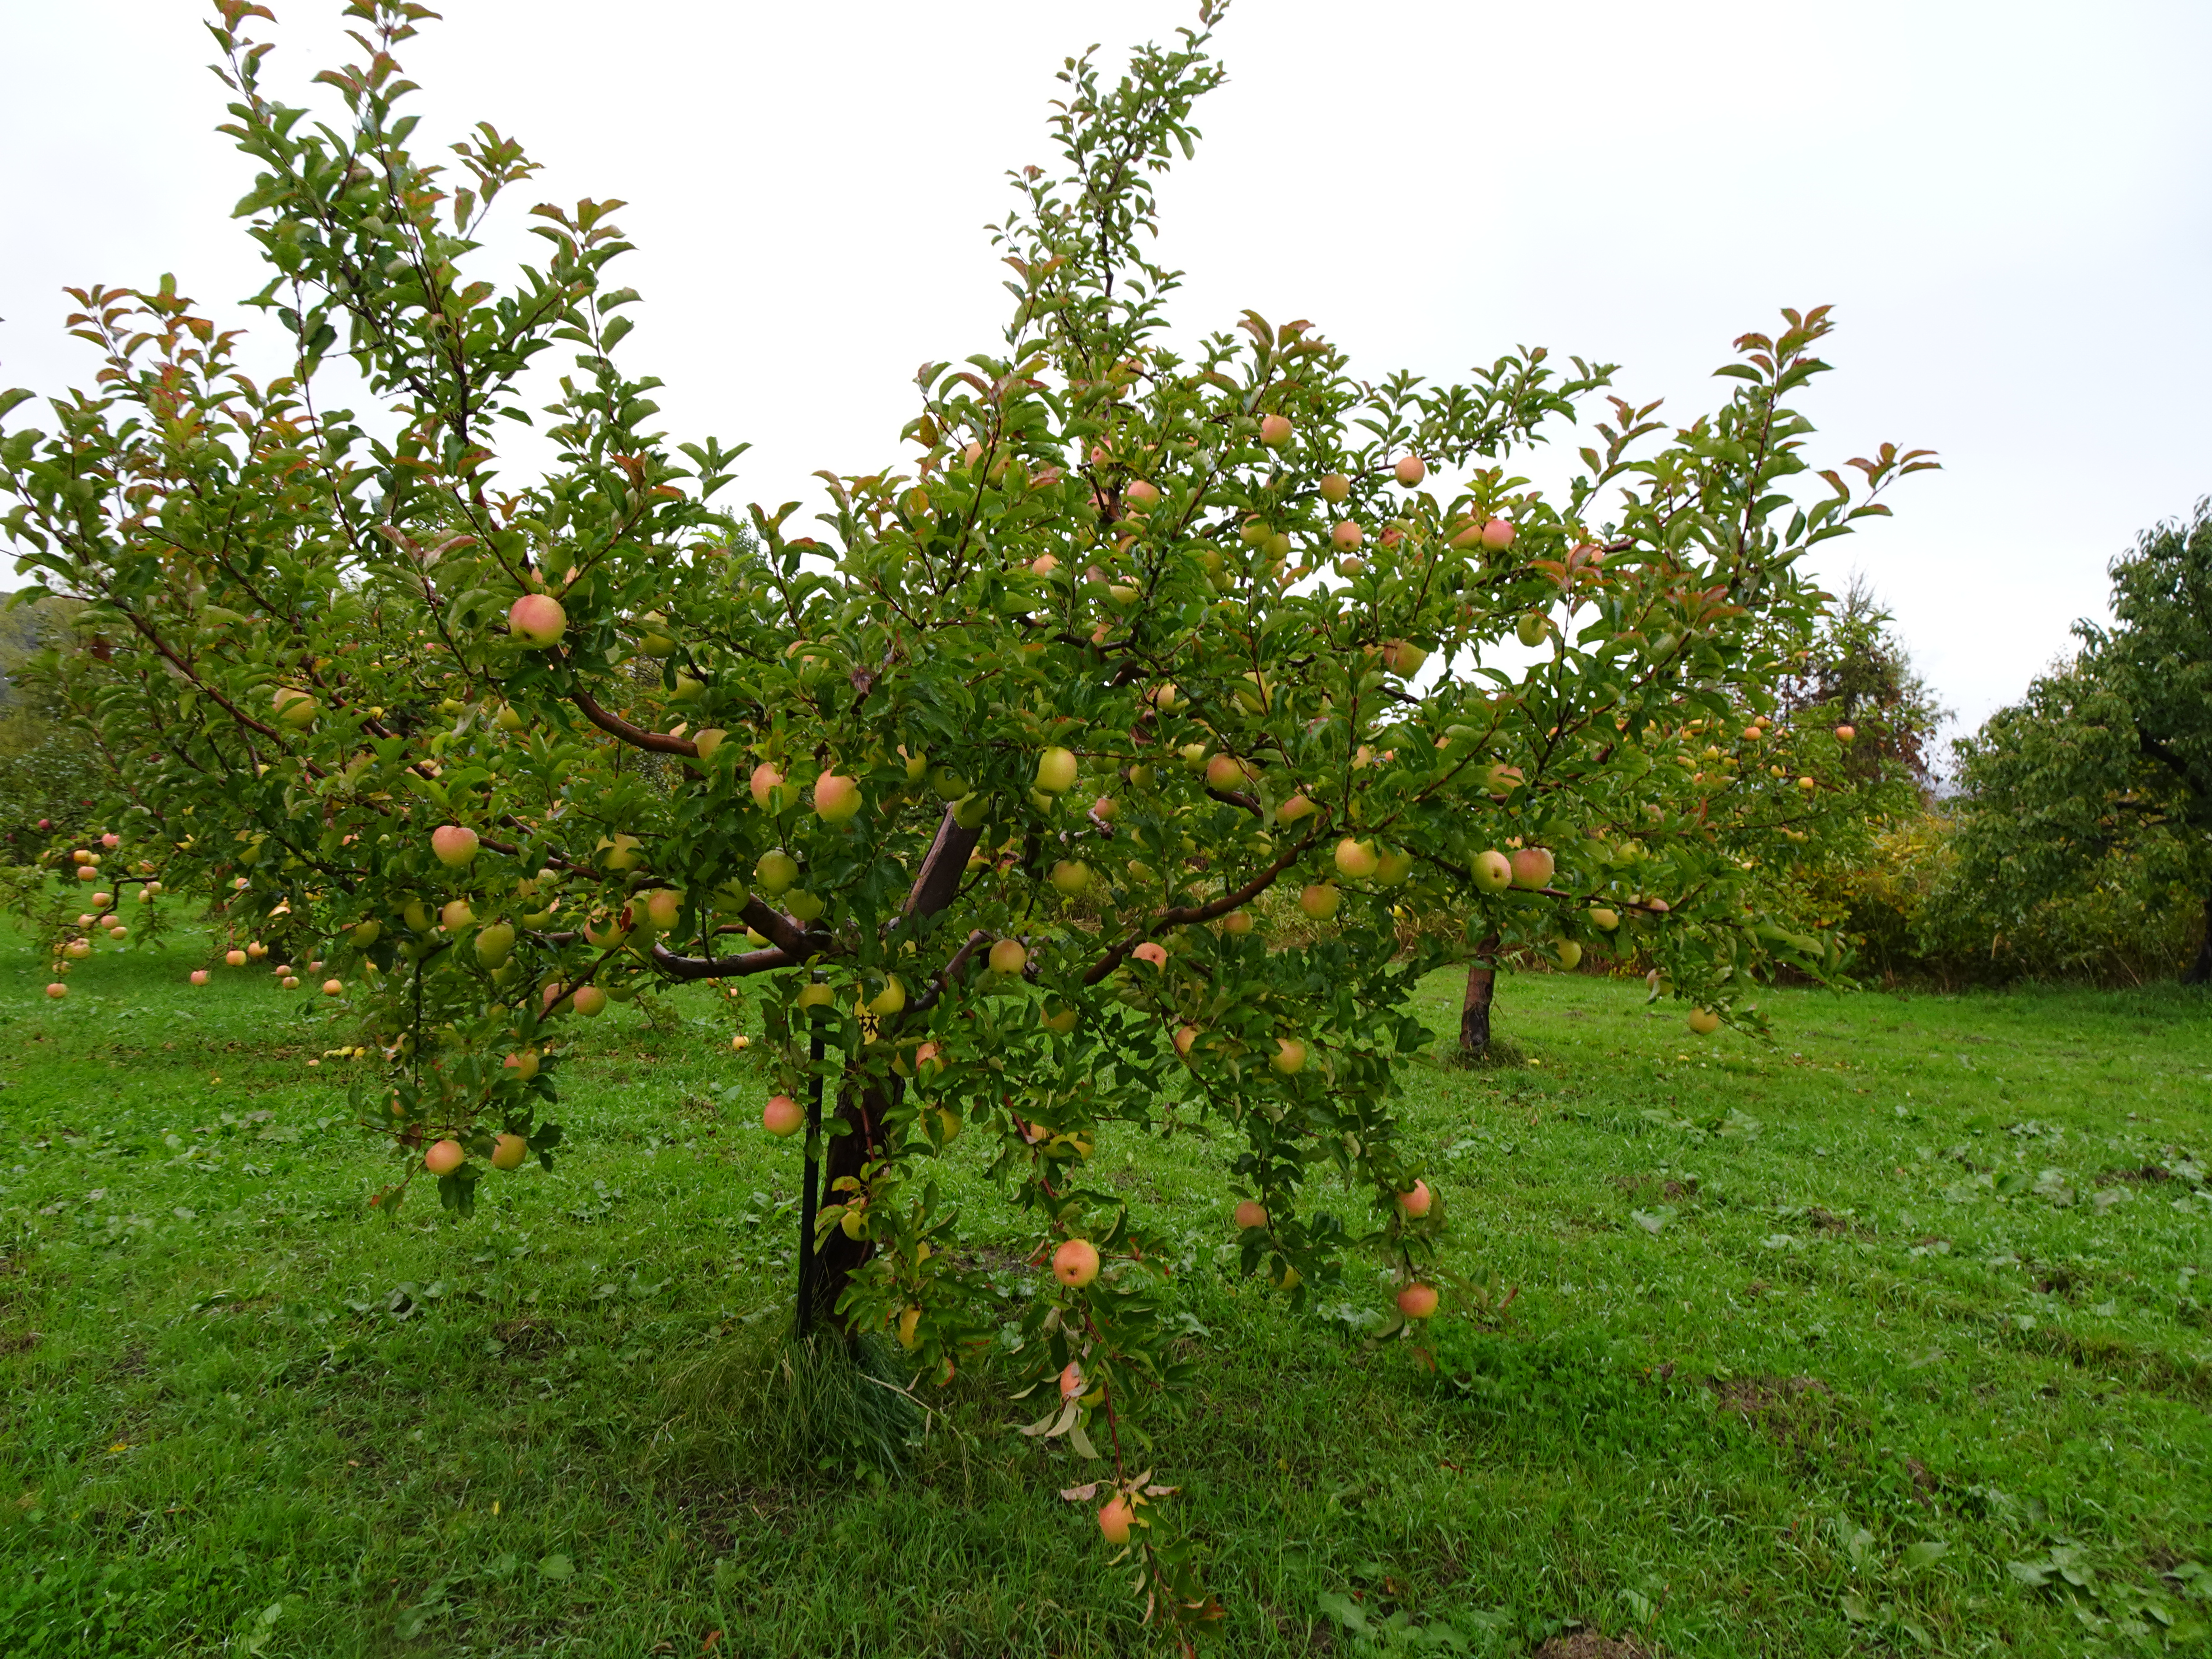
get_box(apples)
[1030,744,1078,797]
[794,968,838,1018]
[1043,855,1094,899]
[342,835,361,853]
[1060,1126,1100,1170]
[605,979,634,1002]
[383,1086,426,1119]
[1171,804,1205,833]
[1125,858,1158,884]
[517,999,535,1016]
[1024,784,1063,818]
[355,1045,376,1064]
[1544,929,1584,973]
[1233,1198,1269,1236]
[494,696,538,735]
[749,757,806,818]
[1187,433,1205,455]
[1082,559,1122,597]
[1462,508,1500,538]
[628,965,643,980]
[424,1134,467,1183]
[1483,760,1528,804]
[444,697,461,711]
[915,1040,955,1084]
[516,866,561,910]
[383,653,398,667]
[1272,780,1333,840]
[1687,1001,1721,1040]
[620,892,658,944]
[1226,692,1255,721]
[1122,474,1162,516]
[387,1044,411,1067]
[521,905,552,933]
[1442,520,1483,553]
[1094,1493,1145,1547]
[1140,443,1166,466]
[593,829,647,860]
[176,833,195,852]
[1236,510,1273,550]
[1431,734,1455,756]
[1347,742,1377,773]
[1593,824,1614,843]
[508,1028,526,1044]
[949,785,992,834]
[405,758,445,794]
[443,671,462,685]
[1175,1022,1218,1063]
[662,659,712,705]
[629,602,687,661]
[541,1040,556,1056]
[880,740,929,791]
[1087,438,1131,479]
[746,922,780,954]
[1256,993,1298,1032]
[529,553,585,604]
[1332,830,1382,883]
[1241,827,1275,860]
[1261,553,1286,576]
[1567,540,1609,587]
[1075,487,1113,525]
[640,888,682,934]
[761,1091,810,1140]
[1028,1103,1078,1160]
[1058,1358,1107,1411]
[127,863,139,875]
[402,897,440,934]
[858,970,907,1021]
[1297,880,1343,922]
[1292,676,1331,720]
[1468,847,1514,901]
[1255,410,1294,454]
[506,591,570,653]
[407,629,426,645]
[1206,751,1250,797]
[1233,668,1266,718]
[1070,522,1096,549]
[397,1031,425,1053]
[1264,1262,1302,1291]
[961,843,992,874]
[572,982,608,1021]
[927,757,977,805]
[1027,552,1072,599]
[1215,1037,1251,1072]
[961,434,1013,490]
[501,1045,543,1085]
[1386,903,1403,918]
[582,903,632,952]
[967,926,995,952]
[690,724,735,771]
[1112,573,1142,605]
[1259,530,1294,563]
[1133,705,1166,742]
[1087,743,1119,776]
[896,1305,940,1355]
[266,904,295,931]
[1003,888,1031,911]
[430,821,482,871]
[470,916,520,972]
[1175,924,1206,960]
[1584,895,1622,934]
[1127,937,1173,985]
[1377,523,1408,552]
[302,885,323,902]
[1118,352,1149,385]
[1395,1277,1440,1323]
[252,765,271,783]
[986,935,1027,983]
[305,1055,323,1072]
[352,875,375,895]
[480,695,502,717]
[1611,832,1632,855]
[1092,796,1124,824]
[276,668,316,702]
[426,640,449,664]
[1168,727,1221,779]
[1421,873,1450,908]
[426,702,449,719]
[512,815,538,839]
[1383,749,1402,766]
[1367,842,1417,893]
[1263,1031,1308,1078]
[1350,637,1385,674]
[272,692,321,738]
[1124,510,1153,536]
[395,806,413,823]
[1218,904,1259,939]
[875,936,917,974]
[1381,633,1432,679]
[1496,691,1523,714]
[1391,454,1429,490]
[704,862,752,916]
[358,698,367,704]
[783,879,832,924]
[339,908,384,948]
[1202,567,1225,591]
[365,957,385,975]
[340,1044,358,1060]
[1336,558,1365,582]
[1036,998,1082,1042]
[896,782,925,809]
[546,798,586,836]
[811,763,869,827]
[666,715,697,750]
[1317,466,1347,508]
[1052,1235,1103,1289]
[840,1197,884,1241]
[309,657,341,682]
[1623,803,1666,836]
[1210,567,1238,596]
[323,1045,343,1063]
[1493,833,1524,861]
[430,1023,459,1048]
[1328,517,1366,557]
[372,833,390,851]
[1646,965,1680,999]
[918,1097,965,1149]
[751,846,802,899]
[1481,517,1518,556]
[369,661,382,675]
[1129,823,1160,853]
[1177,981,1209,1012]
[235,826,280,864]
[1154,676,1197,720]
[1263,679,1295,717]
[888,1032,933,1082]
[1512,612,1555,651]
[1127,759,1168,792]
[486,1131,531,1173]
[1628,895,1668,926]
[1393,1176,1432,1223]
[1088,622,1125,646]
[780,635,832,690]
[1508,844,1558,894]
[369,705,384,719]
[541,979,577,1017]
[1616,836,1652,872]
[440,898,476,938]
[1182,543,1221,575]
